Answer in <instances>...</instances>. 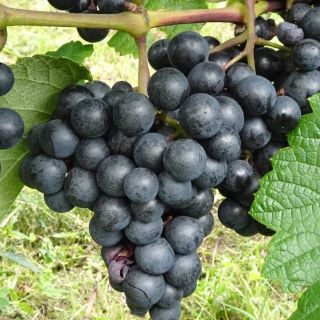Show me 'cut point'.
<instances>
[{
  "instance_id": "2",
  "label": "cut point",
  "mask_w": 320,
  "mask_h": 320,
  "mask_svg": "<svg viewBox=\"0 0 320 320\" xmlns=\"http://www.w3.org/2000/svg\"><path fill=\"white\" fill-rule=\"evenodd\" d=\"M146 34L147 31L136 37L139 50V74L137 83V92L144 94L149 98L147 84L150 80V75L146 64Z\"/></svg>"
},
{
  "instance_id": "1",
  "label": "cut point",
  "mask_w": 320,
  "mask_h": 320,
  "mask_svg": "<svg viewBox=\"0 0 320 320\" xmlns=\"http://www.w3.org/2000/svg\"><path fill=\"white\" fill-rule=\"evenodd\" d=\"M243 1L249 11L248 12L247 30L244 31L243 33L239 34L238 36H236L232 39H229L225 43L210 49V51H209V54L215 53V52H220L228 47L234 46L236 44H239L241 42L248 40L243 52L240 55H238L237 57L231 59L229 61V63L225 67H223L224 72L228 69V67L230 65L239 61L240 59H242L246 55H247V58L249 61V66L255 70L254 57H253L255 44H267V45L285 50L290 53L293 52V49H290V48H287V47H284V46H281V45H278V44H275V43H272V42H269L266 40L256 38L255 31H254V24H255V20H256L255 13H254V4H255L256 0H243ZM255 72H256V70H255Z\"/></svg>"
}]
</instances>
